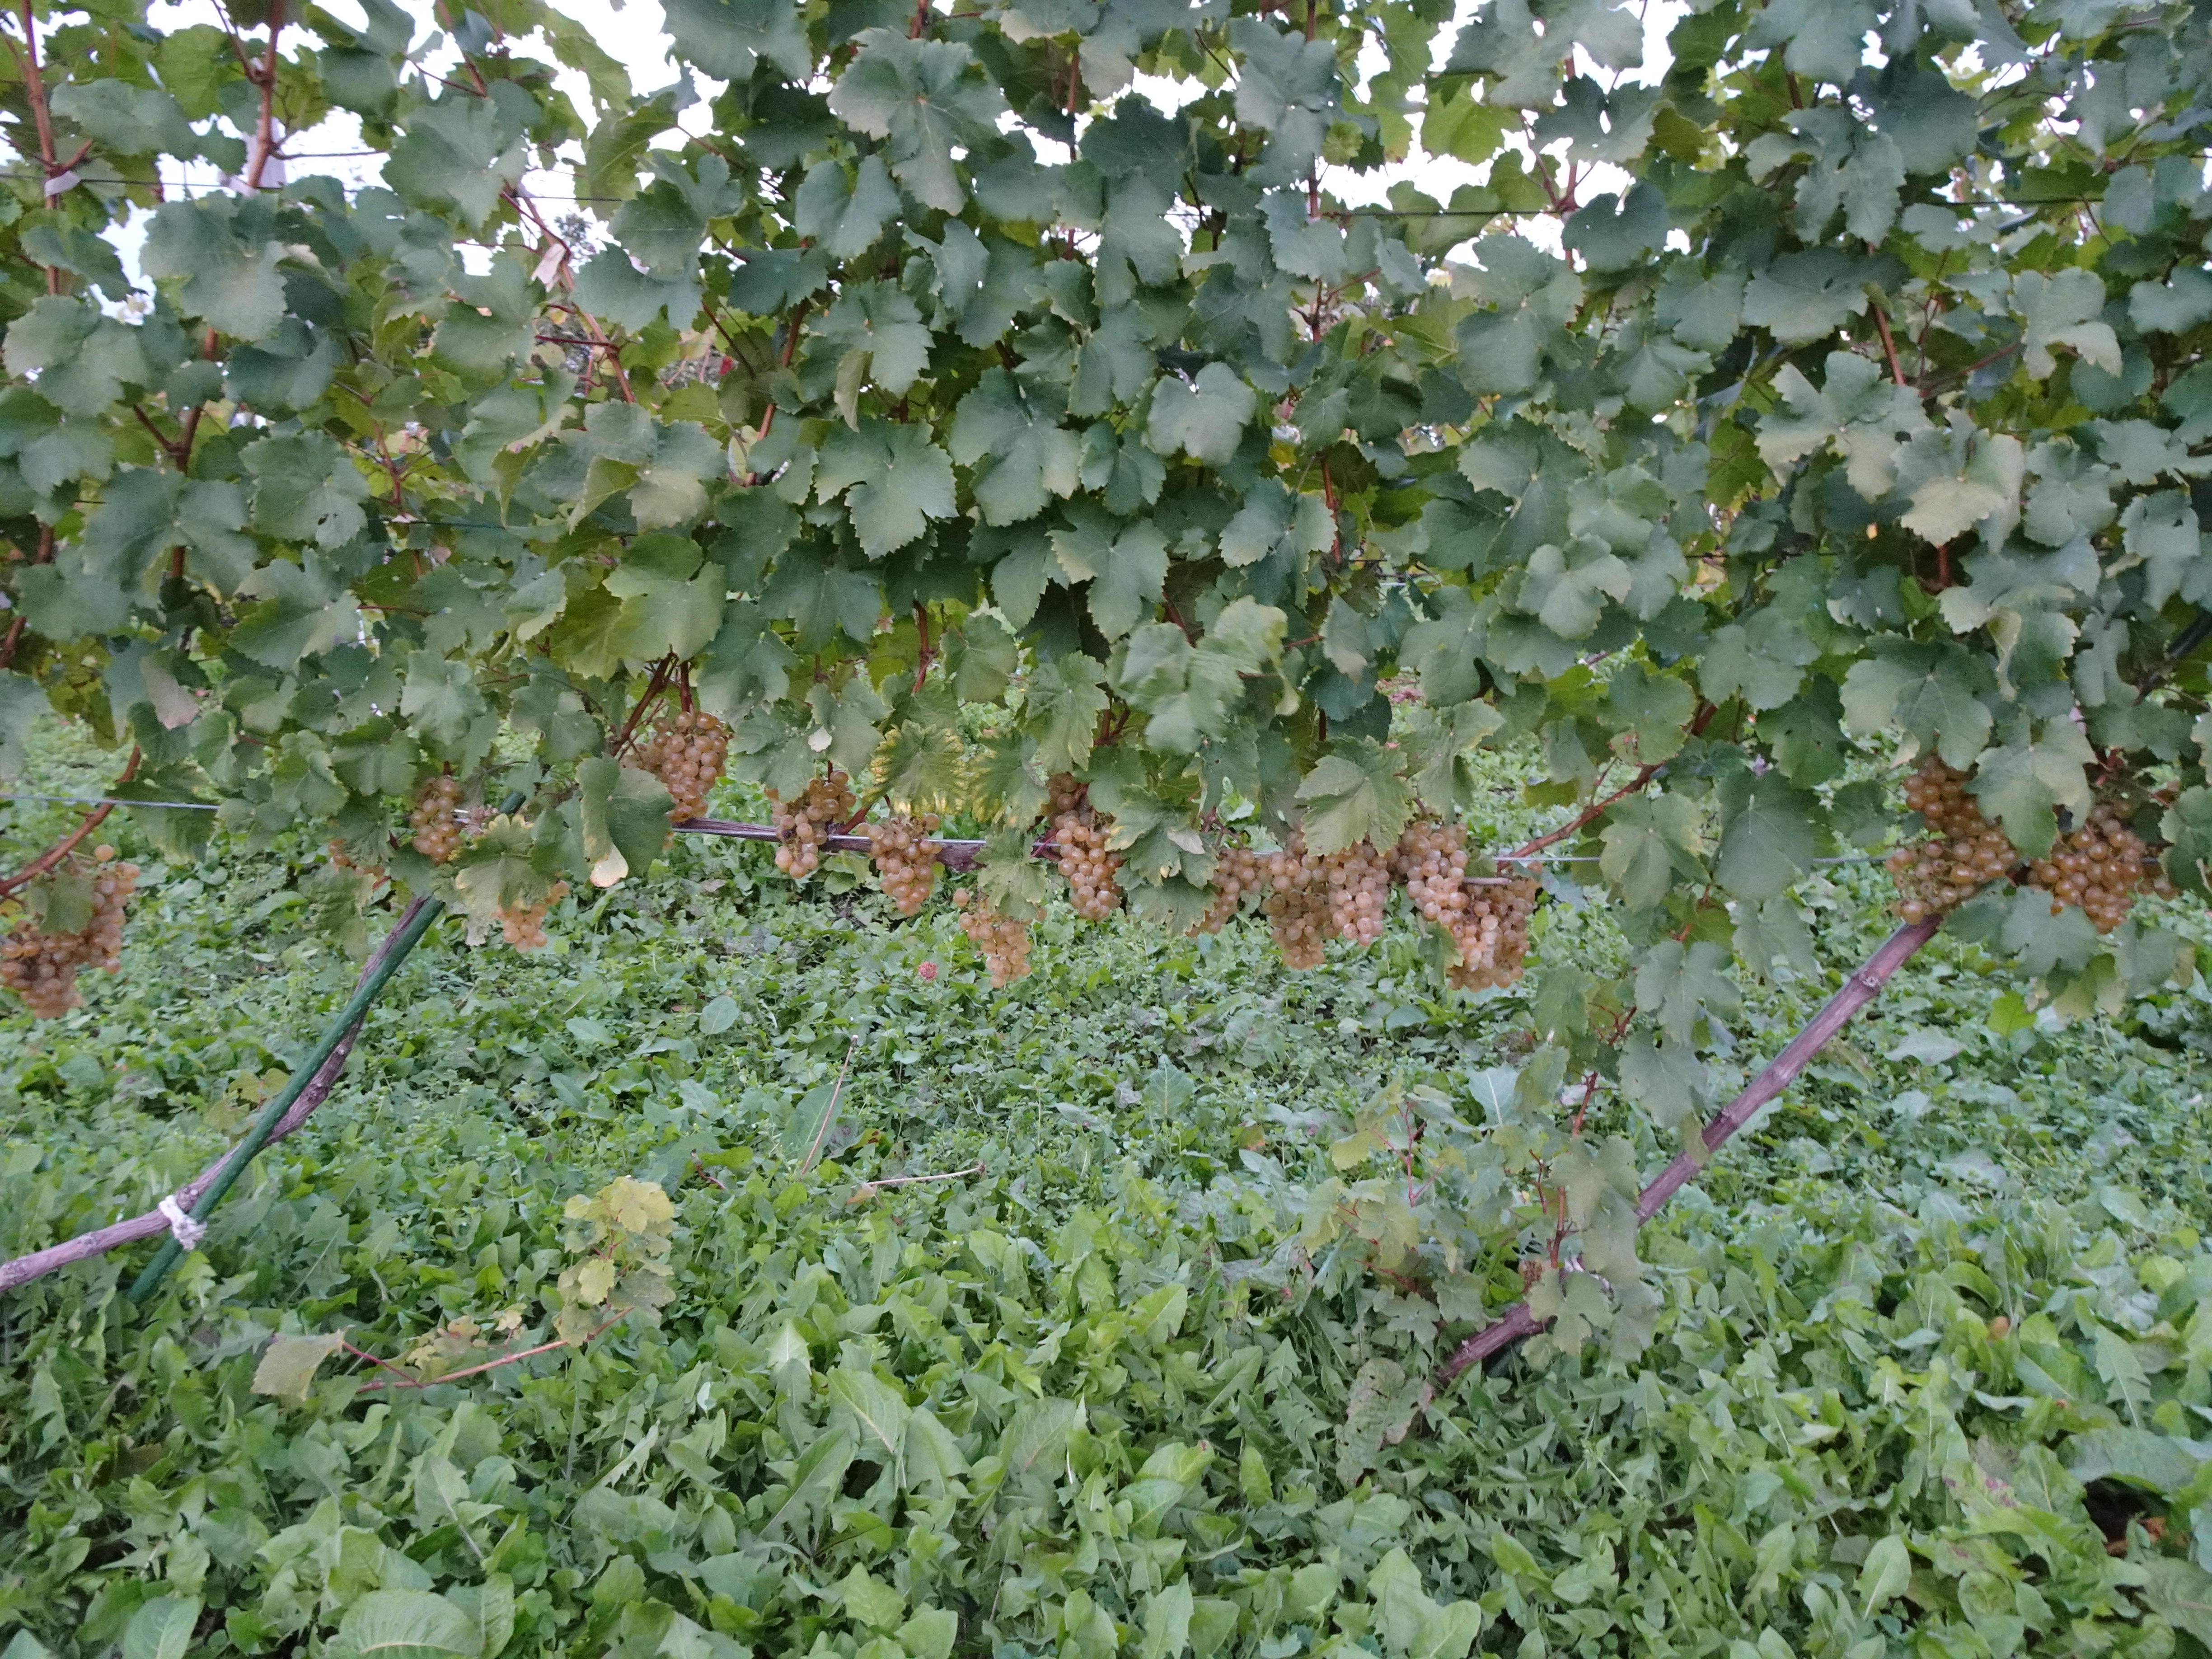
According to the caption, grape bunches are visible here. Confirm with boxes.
[1948,823,2025,886]
[0,893,90,1023]
[1054,818,1123,922]
[858,811,954,920]
[954,885,1048,988]
[1395,819,1470,926]
[403,773,460,864]
[76,845,140,967]
[1884,841,1977,926]
[1903,748,1987,840]
[328,825,403,883]
[2028,828,2074,921]
[764,769,857,881]
[2063,788,2159,935]
[1447,899,1499,994]
[1040,768,1104,830]
[1263,828,1335,893]
[1327,842,1393,949]
[639,712,733,823]
[491,874,575,954]
[1262,886,1331,972]
[1185,848,1257,938]
[1490,852,1546,988]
